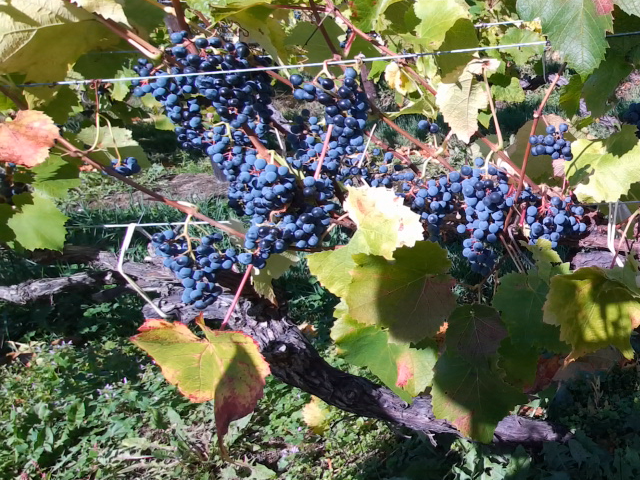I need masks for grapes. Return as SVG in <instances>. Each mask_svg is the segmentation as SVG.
Instances as JSON below:
<instances>
[{
    "mask_svg": "<svg viewBox=\"0 0 640 480\" xmlns=\"http://www.w3.org/2000/svg\"><path fill=\"white\" fill-rule=\"evenodd\" d=\"M130 83L136 87L133 90L136 98L151 93L167 110V118L174 125H180L174 129V134L184 150L204 148V153L220 168L225 180L230 183L227 188L228 207L238 217L252 216V227L244 234L243 248L258 249L259 256L254 257L252 253L237 254L235 249H225V258H221L213 244L222 241L223 235L212 232L200 238L201 245L196 247L194 263L199 269L194 271L188 267L190 260L187 256L172 259L188 250L184 237L173 243L177 235L172 230L151 235L156 255L165 257L163 266L173 271L183 288H186L182 294L184 303L204 310L217 300L222 287L214 285L216 275L213 270L229 271L237 262L242 266L252 264L256 270H263L272 252L284 253L293 242L297 249L319 243V237L332 221L327 213L339 208L337 202H326L323 208L304 203L299 207L297 216L293 213L284 214L278 226L274 222L269 227L256 226L268 219L267 214L271 210H279L290 202L297 190L296 178L291 175L290 169L287 166L278 168L274 164L267 166L264 159H259L251 140L239 130L244 125L248 126L262 144L269 142L266 121L274 115V110L266 106L276 95L269 75L247 72L191 76L171 81L153 80L146 84L140 81ZM193 87L204 98L212 99L211 106L215 108V114L222 122L229 123L235 144L231 150L228 149L231 139L224 136L227 128L223 124L203 131L200 106L195 96L187 99L188 106L183 111L179 97L191 93Z\"/></svg>",
    "mask_w": 640,
    "mask_h": 480,
    "instance_id": "obj_1",
    "label": "grapes"
},
{
    "mask_svg": "<svg viewBox=\"0 0 640 480\" xmlns=\"http://www.w3.org/2000/svg\"><path fill=\"white\" fill-rule=\"evenodd\" d=\"M474 162L475 166L463 164L459 171H451L448 177L441 175L438 180L430 179L427 182V190L421 188L414 192L415 198L411 207L417 209L419 216L426 221L428 232L436 236L441 233L438 226L443 222L442 218L455 210L452 201L454 194H462L467 205V223H459L456 231L461 234L469 231L472 237L463 241L461 256L469 261H476L470 267L473 273L479 272L482 277H487L499 255L484 249L480 241L485 240L488 244L498 241L495 233L503 229V209L512 206L516 191L512 190L507 195L511 187L509 178L492 164L487 166V172L490 176H497V187L491 179L480 180L483 176L481 167L485 165V160L476 157Z\"/></svg>",
    "mask_w": 640,
    "mask_h": 480,
    "instance_id": "obj_2",
    "label": "grapes"
},
{
    "mask_svg": "<svg viewBox=\"0 0 640 480\" xmlns=\"http://www.w3.org/2000/svg\"><path fill=\"white\" fill-rule=\"evenodd\" d=\"M357 72L351 67H347L344 78L341 80L342 87L337 90L338 101L334 102L333 97L326 91L335 89V82L331 77H319L317 82L326 90H322L310 83H305L303 88H296L293 91L295 100H306L307 102L318 101L324 105L325 124L332 126L329 147L325 151L323 170L336 171L339 168V155H353L355 152H363L366 148L365 138L358 131L365 128L368 120L366 110L367 94L357 92L358 84L354 81Z\"/></svg>",
    "mask_w": 640,
    "mask_h": 480,
    "instance_id": "obj_3",
    "label": "grapes"
},
{
    "mask_svg": "<svg viewBox=\"0 0 640 480\" xmlns=\"http://www.w3.org/2000/svg\"><path fill=\"white\" fill-rule=\"evenodd\" d=\"M187 37L186 30L172 31L170 33V42L175 45L171 48V55L182 64V67L170 69L172 74L185 73L189 71H199L216 69L218 67L222 69H240L249 67L247 58L249 56V48L242 41H236L232 43H224L220 38L210 37L205 39L200 37L195 41L197 49H206L211 46L213 50L222 49L226 54L224 58L221 54H207L205 57H201L199 54L187 53V49L183 43L184 38Z\"/></svg>",
    "mask_w": 640,
    "mask_h": 480,
    "instance_id": "obj_4",
    "label": "grapes"
},
{
    "mask_svg": "<svg viewBox=\"0 0 640 480\" xmlns=\"http://www.w3.org/2000/svg\"><path fill=\"white\" fill-rule=\"evenodd\" d=\"M550 203L549 209L551 211L546 213L541 223H536L535 218L538 215V207L531 205L527 208L525 222L530 225L528 240L530 245H535L540 237L542 240H550V245L556 248L563 234L572 232L580 234L588 228L585 222L577 221L574 217L584 216L586 214L585 207L575 205L570 195L563 199L552 197Z\"/></svg>",
    "mask_w": 640,
    "mask_h": 480,
    "instance_id": "obj_5",
    "label": "grapes"
},
{
    "mask_svg": "<svg viewBox=\"0 0 640 480\" xmlns=\"http://www.w3.org/2000/svg\"><path fill=\"white\" fill-rule=\"evenodd\" d=\"M393 170L395 172H392L390 174V177L384 176L383 178L370 179V177L368 176L367 167L360 168L359 166H351L341 168L338 173L334 175V180L343 181L344 186H352L354 184V181L351 178L344 179V177H346L347 175L352 176L359 174L363 181L368 182V184L374 188H378L380 185L389 186L392 181H406L401 184L402 192L395 193L396 197L405 198L406 194L404 192L410 191L412 189V186L408 182L413 181L415 179V175L411 172L400 174L396 173L402 172L404 170V166L402 164L395 165L393 167ZM334 180L331 177L327 176L325 173H322L320 175V178H314L311 175H307L302 179V194L305 197H312L314 195V197L318 201L330 199L335 192Z\"/></svg>",
    "mask_w": 640,
    "mask_h": 480,
    "instance_id": "obj_6",
    "label": "grapes"
},
{
    "mask_svg": "<svg viewBox=\"0 0 640 480\" xmlns=\"http://www.w3.org/2000/svg\"><path fill=\"white\" fill-rule=\"evenodd\" d=\"M294 122L298 125L290 127L291 133L287 136V142L291 144L293 150H296V153L293 157L287 156L285 161L296 169H300L303 165L308 170L315 171L318 168V162L316 160L311 162L310 159L324 149V144L316 142L313 135H305L302 126L304 120L301 116H296Z\"/></svg>",
    "mask_w": 640,
    "mask_h": 480,
    "instance_id": "obj_7",
    "label": "grapes"
},
{
    "mask_svg": "<svg viewBox=\"0 0 640 480\" xmlns=\"http://www.w3.org/2000/svg\"><path fill=\"white\" fill-rule=\"evenodd\" d=\"M568 130V125L566 123H561L559 125V138L555 139L552 135L556 131V127L554 125H548L546 127V133L549 135H534L529 138V143L531 144L530 154L534 158H538L539 156H551L553 160H559L563 157L567 162H570L573 159L571 154V142L569 140H565L564 133Z\"/></svg>",
    "mask_w": 640,
    "mask_h": 480,
    "instance_id": "obj_8",
    "label": "grapes"
},
{
    "mask_svg": "<svg viewBox=\"0 0 640 480\" xmlns=\"http://www.w3.org/2000/svg\"><path fill=\"white\" fill-rule=\"evenodd\" d=\"M119 163L118 159L110 160V168L119 174H123L124 176H131L133 173H138L141 171V166L139 164V160L136 157H127L122 160V164L116 166Z\"/></svg>",
    "mask_w": 640,
    "mask_h": 480,
    "instance_id": "obj_9",
    "label": "grapes"
},
{
    "mask_svg": "<svg viewBox=\"0 0 640 480\" xmlns=\"http://www.w3.org/2000/svg\"><path fill=\"white\" fill-rule=\"evenodd\" d=\"M307 122L309 123L310 132L315 134L319 140L324 141L327 138L328 131L324 129L322 124H318L319 119L316 116H310Z\"/></svg>",
    "mask_w": 640,
    "mask_h": 480,
    "instance_id": "obj_10",
    "label": "grapes"
},
{
    "mask_svg": "<svg viewBox=\"0 0 640 480\" xmlns=\"http://www.w3.org/2000/svg\"><path fill=\"white\" fill-rule=\"evenodd\" d=\"M137 63L139 65H135L133 70L138 73L139 76H149L151 70L154 68V64L149 62L147 58H139Z\"/></svg>",
    "mask_w": 640,
    "mask_h": 480,
    "instance_id": "obj_11",
    "label": "grapes"
},
{
    "mask_svg": "<svg viewBox=\"0 0 640 480\" xmlns=\"http://www.w3.org/2000/svg\"><path fill=\"white\" fill-rule=\"evenodd\" d=\"M542 195L540 193H533V189L531 187H527L524 191L520 192L517 200L520 203L527 202L529 199L531 200H540Z\"/></svg>",
    "mask_w": 640,
    "mask_h": 480,
    "instance_id": "obj_12",
    "label": "grapes"
},
{
    "mask_svg": "<svg viewBox=\"0 0 640 480\" xmlns=\"http://www.w3.org/2000/svg\"><path fill=\"white\" fill-rule=\"evenodd\" d=\"M362 157H363V154L358 153L355 157H348V158L345 160V163H346L347 165H353V164H355L357 161H361V160H362ZM364 161H365V156H364V158H363L362 162H364Z\"/></svg>",
    "mask_w": 640,
    "mask_h": 480,
    "instance_id": "obj_13",
    "label": "grapes"
},
{
    "mask_svg": "<svg viewBox=\"0 0 640 480\" xmlns=\"http://www.w3.org/2000/svg\"><path fill=\"white\" fill-rule=\"evenodd\" d=\"M382 157H383L382 159L383 163H387V162L391 163L393 161V155L388 152L383 153Z\"/></svg>",
    "mask_w": 640,
    "mask_h": 480,
    "instance_id": "obj_14",
    "label": "grapes"
}]
</instances>
